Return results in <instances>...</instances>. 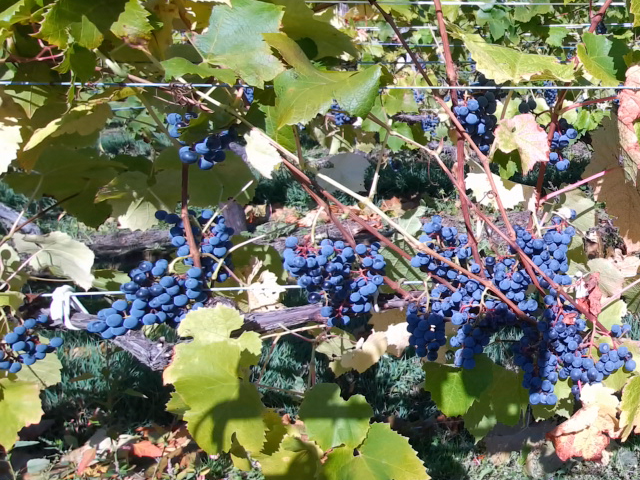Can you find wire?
Here are the masks:
<instances>
[{
	"label": "wire",
	"mask_w": 640,
	"mask_h": 480,
	"mask_svg": "<svg viewBox=\"0 0 640 480\" xmlns=\"http://www.w3.org/2000/svg\"><path fill=\"white\" fill-rule=\"evenodd\" d=\"M379 90H409V89H426V90H483V91H501V90H577V91H594V90H640V85H591V86H579V85H499V86H485V85H428V84H407V85H389L381 84L378 86Z\"/></svg>",
	"instance_id": "d2f4af69"
},
{
	"label": "wire",
	"mask_w": 640,
	"mask_h": 480,
	"mask_svg": "<svg viewBox=\"0 0 640 480\" xmlns=\"http://www.w3.org/2000/svg\"><path fill=\"white\" fill-rule=\"evenodd\" d=\"M87 87H98V86H111V87H120V86H133V87H145V88H155V87H170V88H182V87H219V88H227V83L221 82H135V81H96V82H87Z\"/></svg>",
	"instance_id": "a73af890"
},
{
	"label": "wire",
	"mask_w": 640,
	"mask_h": 480,
	"mask_svg": "<svg viewBox=\"0 0 640 480\" xmlns=\"http://www.w3.org/2000/svg\"><path fill=\"white\" fill-rule=\"evenodd\" d=\"M300 284H281V285H268L261 287H245V286H237V287H202V292H263V291H271V290H283V289H300Z\"/></svg>",
	"instance_id": "4f2155b8"
},
{
	"label": "wire",
	"mask_w": 640,
	"mask_h": 480,
	"mask_svg": "<svg viewBox=\"0 0 640 480\" xmlns=\"http://www.w3.org/2000/svg\"><path fill=\"white\" fill-rule=\"evenodd\" d=\"M31 86V87H40V86H53V85H71L70 80H50V81H10V80H0V86Z\"/></svg>",
	"instance_id": "f0478fcc"
},
{
	"label": "wire",
	"mask_w": 640,
	"mask_h": 480,
	"mask_svg": "<svg viewBox=\"0 0 640 480\" xmlns=\"http://www.w3.org/2000/svg\"><path fill=\"white\" fill-rule=\"evenodd\" d=\"M71 296H93V297H102L105 295L119 296L120 292L115 290H103L99 292L95 291H71Z\"/></svg>",
	"instance_id": "a009ed1b"
}]
</instances>
